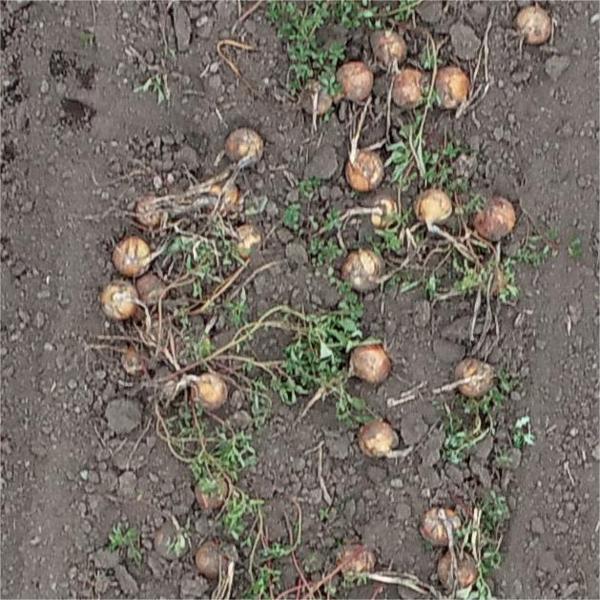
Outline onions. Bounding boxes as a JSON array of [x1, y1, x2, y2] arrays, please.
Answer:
[[344, 151, 382, 189], [207, 178, 237, 208], [336, 61, 372, 99], [480, 261, 511, 294], [154, 368, 178, 398], [119, 345, 145, 373], [472, 197, 514, 238], [356, 418, 395, 456], [232, 224, 262, 257], [223, 127, 262, 163], [192, 540, 227, 576], [419, 510, 453, 544], [340, 246, 382, 288], [369, 198, 399, 228], [513, 5, 551, 43], [391, 70, 423, 105], [350, 342, 391, 382], [434, 67, 469, 104], [437, 550, 476, 586], [137, 271, 170, 305], [192, 372, 226, 408], [193, 474, 228, 512], [414, 188, 451, 224], [372, 29, 405, 64], [300, 86, 330, 118], [130, 195, 164, 233], [154, 522, 190, 558], [456, 357, 492, 396], [334, 542, 373, 575], [111, 235, 150, 273], [98, 280, 137, 318]]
